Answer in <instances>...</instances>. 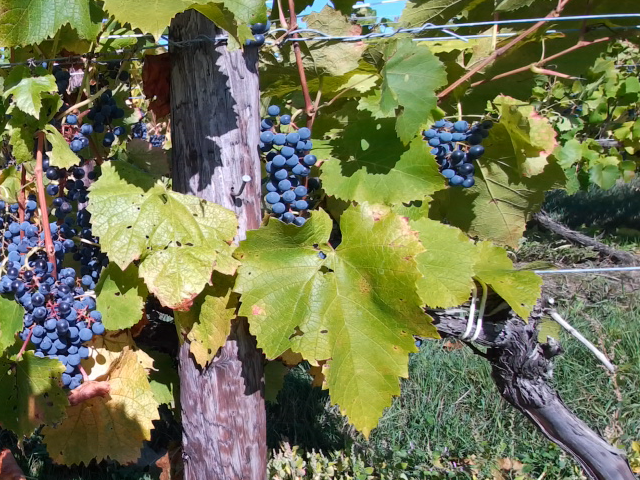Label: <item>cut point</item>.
Wrapping results in <instances>:
<instances>
[{
	"mask_svg": "<svg viewBox=\"0 0 640 480\" xmlns=\"http://www.w3.org/2000/svg\"><path fill=\"white\" fill-rule=\"evenodd\" d=\"M304 114H307V112H306L305 108H304V109L299 108V109L295 110V111L292 113V115H291V119H292V120H295L298 116H302V115H304Z\"/></svg>",
	"mask_w": 640,
	"mask_h": 480,
	"instance_id": "1",
	"label": "cut point"
}]
</instances>
